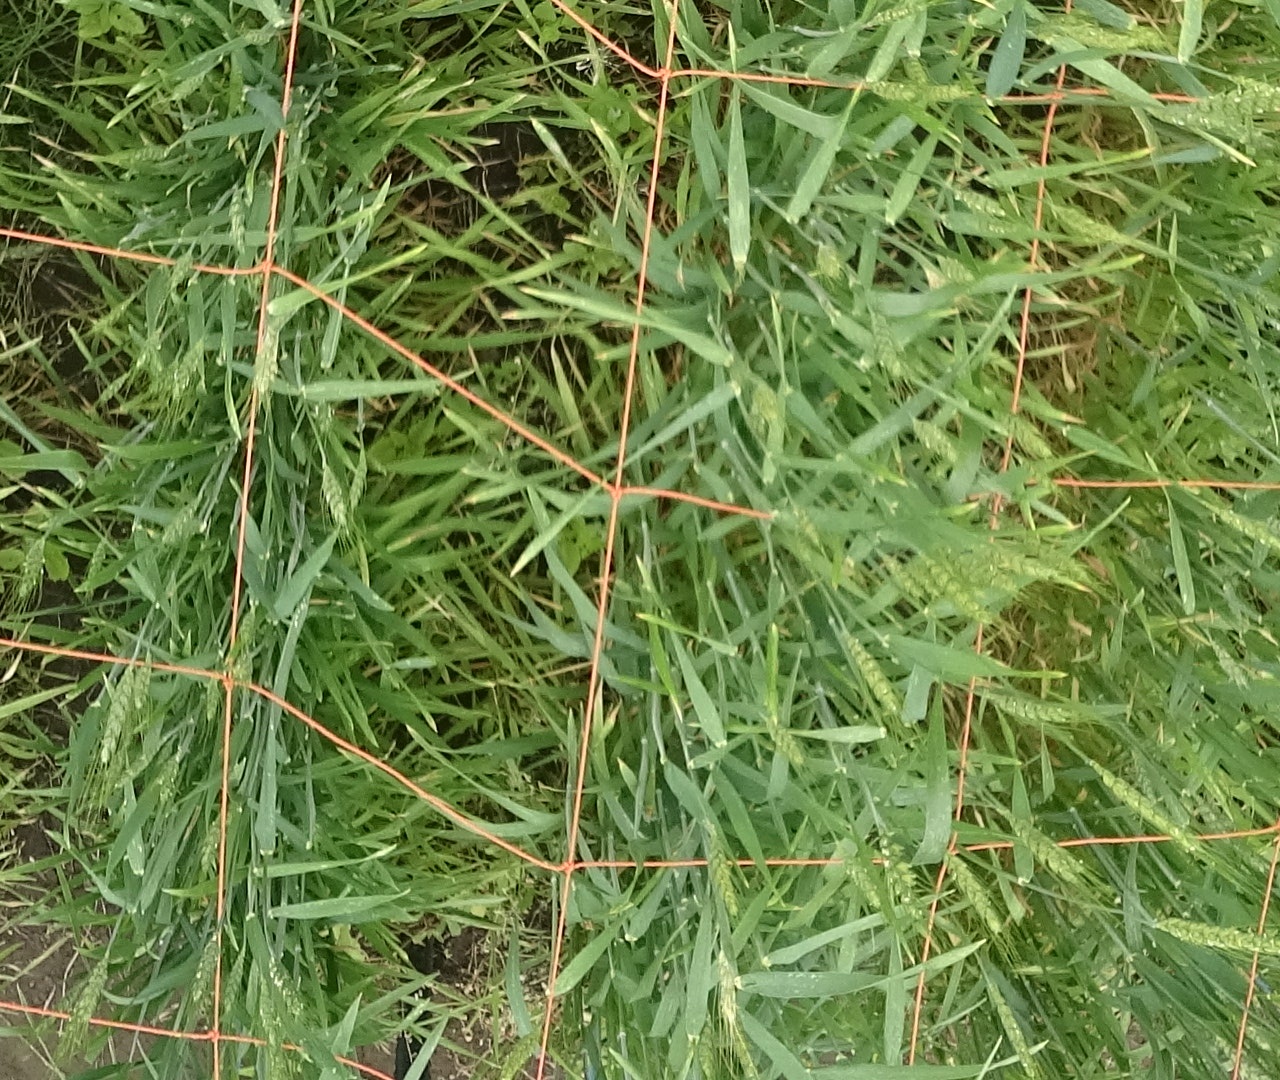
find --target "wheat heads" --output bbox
[133,658,152,708]
[763,712,799,761]
[795,508,826,547]
[239,611,254,638]
[1044,8,1155,65]
[63,966,105,1037]
[962,191,1001,224]
[82,544,107,589]
[897,44,928,86]
[839,635,891,700]
[948,853,1003,925]
[225,956,244,1009]
[98,374,124,401]
[881,557,923,599]
[988,991,1026,1070]
[190,937,219,990]
[981,531,1067,587]
[252,335,279,385]
[713,949,737,1022]
[1209,506,1278,552]
[995,687,1068,726]
[903,414,957,462]
[930,250,973,285]
[869,0,942,27]
[173,249,195,289]
[17,539,50,588]
[872,304,900,379]
[695,830,735,913]
[1101,770,1188,843]
[201,674,221,722]
[165,344,202,397]
[227,186,251,254]
[1051,195,1113,245]
[314,463,348,529]
[845,856,880,912]
[1010,813,1070,880]
[121,139,164,168]
[267,959,307,1003]
[86,296,123,337]
[100,669,130,750]
[918,556,994,633]
[1144,918,1275,948]
[999,408,1050,460]
[204,812,230,861]
[1179,83,1280,130]
[750,376,789,432]
[163,502,193,542]
[814,239,843,277]
[869,75,911,102]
